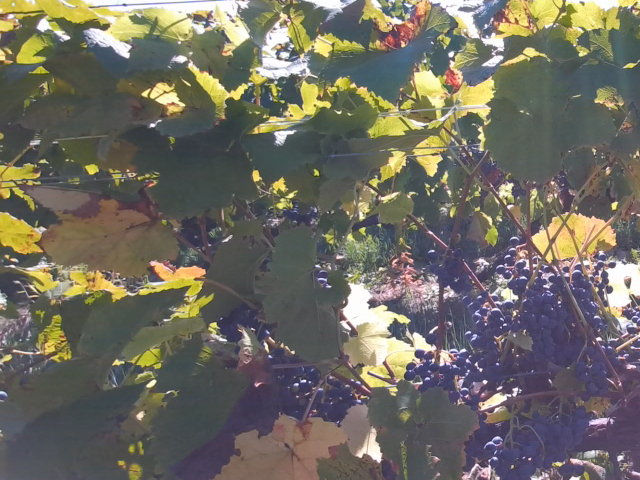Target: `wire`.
Masks as SVG:
<instances>
[{"instance_id": "1", "label": "wire", "mask_w": 640, "mask_h": 480, "mask_svg": "<svg viewBox=\"0 0 640 480\" xmlns=\"http://www.w3.org/2000/svg\"><path fill=\"white\" fill-rule=\"evenodd\" d=\"M478 146H479L478 142H464L459 144H447V145H438V146L422 145V146H406V147H400V148H375V149H369V150H364L359 152L330 154L329 158L342 159V158H348V157H361V156H367V155L378 154V153H402V152H408V151H440V150H449V149H462L466 147H478Z\"/></svg>"}, {"instance_id": "2", "label": "wire", "mask_w": 640, "mask_h": 480, "mask_svg": "<svg viewBox=\"0 0 640 480\" xmlns=\"http://www.w3.org/2000/svg\"><path fill=\"white\" fill-rule=\"evenodd\" d=\"M488 109H489L488 105H461V106L449 105V106L434 107V108H428V109H416V108L393 109V110L379 111L378 115L389 116V115L407 114V113L430 114V113H437V112H444V111L488 110Z\"/></svg>"}, {"instance_id": "3", "label": "wire", "mask_w": 640, "mask_h": 480, "mask_svg": "<svg viewBox=\"0 0 640 480\" xmlns=\"http://www.w3.org/2000/svg\"><path fill=\"white\" fill-rule=\"evenodd\" d=\"M308 118L307 117H296V118H288V119H282V120H270L267 119L266 123L262 124L263 128H269V127H283L286 126L290 123H299V122H307Z\"/></svg>"}, {"instance_id": "4", "label": "wire", "mask_w": 640, "mask_h": 480, "mask_svg": "<svg viewBox=\"0 0 640 480\" xmlns=\"http://www.w3.org/2000/svg\"><path fill=\"white\" fill-rule=\"evenodd\" d=\"M106 133L100 134H89V135H81V136H71V137H56V142H74V141H83V140H92V139H103L106 138Z\"/></svg>"}]
</instances>
